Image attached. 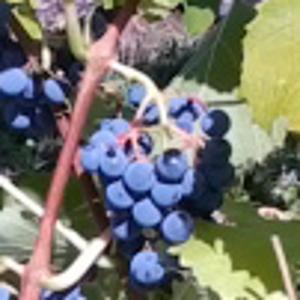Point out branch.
<instances>
[{
  "instance_id": "325d2c04",
  "label": "branch",
  "mask_w": 300,
  "mask_h": 300,
  "mask_svg": "<svg viewBox=\"0 0 300 300\" xmlns=\"http://www.w3.org/2000/svg\"><path fill=\"white\" fill-rule=\"evenodd\" d=\"M7 24L34 69L37 78L39 80L47 79L48 72L43 65L41 41L38 38L33 39L30 30L15 11L11 12V20H8Z\"/></svg>"
},
{
  "instance_id": "30e6481e",
  "label": "branch",
  "mask_w": 300,
  "mask_h": 300,
  "mask_svg": "<svg viewBox=\"0 0 300 300\" xmlns=\"http://www.w3.org/2000/svg\"><path fill=\"white\" fill-rule=\"evenodd\" d=\"M137 8L136 0H127L112 23L105 26V33L90 46L85 59V74L75 107L71 113L54 104L48 103L47 109L55 120L62 138L65 140L58 154L57 166L46 193V209L42 213L34 254L29 263L22 267L19 280L20 300H39L51 259V237L58 210L64 200L65 185L71 167L80 178L83 191L92 213L94 225L105 230L109 221L105 215L96 183L91 173L81 166L78 157L83 144L80 137L88 122L96 96V85L103 79L106 71L115 61L118 52L119 35L129 22L130 15Z\"/></svg>"
}]
</instances>
